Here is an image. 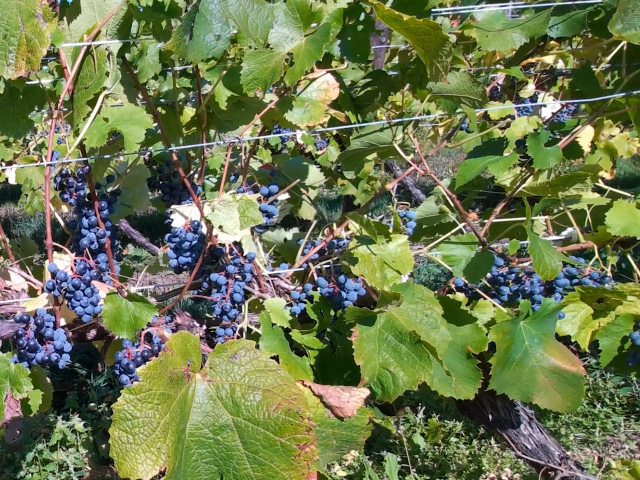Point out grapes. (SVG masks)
<instances>
[{
    "instance_id": "ef6de9ee",
    "label": "grapes",
    "mask_w": 640,
    "mask_h": 480,
    "mask_svg": "<svg viewBox=\"0 0 640 480\" xmlns=\"http://www.w3.org/2000/svg\"><path fill=\"white\" fill-rule=\"evenodd\" d=\"M302 290L303 293L298 290H293L290 293V297L295 301L290 307V313L292 315H299L301 312H304L306 310V305L303 302L298 301L307 300L314 290V285L311 282H305L302 285Z\"/></svg>"
},
{
    "instance_id": "012428b0",
    "label": "grapes",
    "mask_w": 640,
    "mask_h": 480,
    "mask_svg": "<svg viewBox=\"0 0 640 480\" xmlns=\"http://www.w3.org/2000/svg\"><path fill=\"white\" fill-rule=\"evenodd\" d=\"M253 184H254V181H253V180H249L248 182H246V185H245L246 187H244V186H242V185H239V186H237V187H236V191H237L238 193H244V192H247L248 194L254 195V194H255V190H254V189L249 188V187H250V186H252Z\"/></svg>"
},
{
    "instance_id": "9fbda902",
    "label": "grapes",
    "mask_w": 640,
    "mask_h": 480,
    "mask_svg": "<svg viewBox=\"0 0 640 480\" xmlns=\"http://www.w3.org/2000/svg\"><path fill=\"white\" fill-rule=\"evenodd\" d=\"M320 241L318 239L315 240H311L308 243H306L304 245V247L302 248V254L306 255L308 252H310L312 250V248H314Z\"/></svg>"
},
{
    "instance_id": "84f90ec7",
    "label": "grapes",
    "mask_w": 640,
    "mask_h": 480,
    "mask_svg": "<svg viewBox=\"0 0 640 480\" xmlns=\"http://www.w3.org/2000/svg\"><path fill=\"white\" fill-rule=\"evenodd\" d=\"M496 266L489 268L491 276L488 278V284L490 286H499L498 294L495 291H491L489 296L497 304H501L503 301H509L511 299V293L516 300L522 301L524 299L523 294H533L532 300L534 301L531 306V310L536 312L540 309L541 302L544 300L545 286L543 280L539 277V274L532 270L530 267L525 269V272L518 276L522 269L520 267L512 266L509 271L504 274L497 267H504L506 260L500 255H494L492 257Z\"/></svg>"
},
{
    "instance_id": "802abce8",
    "label": "grapes",
    "mask_w": 640,
    "mask_h": 480,
    "mask_svg": "<svg viewBox=\"0 0 640 480\" xmlns=\"http://www.w3.org/2000/svg\"><path fill=\"white\" fill-rule=\"evenodd\" d=\"M257 191L260 196H267L269 200H272L273 197L280 191V186L278 182L271 181L269 183V187H258Z\"/></svg>"
},
{
    "instance_id": "91a60905",
    "label": "grapes",
    "mask_w": 640,
    "mask_h": 480,
    "mask_svg": "<svg viewBox=\"0 0 640 480\" xmlns=\"http://www.w3.org/2000/svg\"><path fill=\"white\" fill-rule=\"evenodd\" d=\"M278 203L279 200L274 199L272 203L265 202L259 205V210L262 211V218L266 223H272L274 221L273 215H277L279 213V210L276 207Z\"/></svg>"
},
{
    "instance_id": "f8a65327",
    "label": "grapes",
    "mask_w": 640,
    "mask_h": 480,
    "mask_svg": "<svg viewBox=\"0 0 640 480\" xmlns=\"http://www.w3.org/2000/svg\"><path fill=\"white\" fill-rule=\"evenodd\" d=\"M203 224L192 220L189 232L183 228H172L170 233L164 236V241L169 243L170 250L167 257L170 267L176 275L192 268L204 246Z\"/></svg>"
},
{
    "instance_id": "e5b3c951",
    "label": "grapes",
    "mask_w": 640,
    "mask_h": 480,
    "mask_svg": "<svg viewBox=\"0 0 640 480\" xmlns=\"http://www.w3.org/2000/svg\"><path fill=\"white\" fill-rule=\"evenodd\" d=\"M172 179L170 173L160 175L158 181L152 183V187L156 190H161V201L165 203L167 208H170L173 204H188L192 200V196L189 192L184 190V186L181 183H176Z\"/></svg>"
},
{
    "instance_id": "dcf779d0",
    "label": "grapes",
    "mask_w": 640,
    "mask_h": 480,
    "mask_svg": "<svg viewBox=\"0 0 640 480\" xmlns=\"http://www.w3.org/2000/svg\"><path fill=\"white\" fill-rule=\"evenodd\" d=\"M237 332V326L233 325L232 329L230 328H217L215 330L216 333V337L214 338V341L218 344H224L227 341V337L228 338H232Z\"/></svg>"
},
{
    "instance_id": "0513c4c2",
    "label": "grapes",
    "mask_w": 640,
    "mask_h": 480,
    "mask_svg": "<svg viewBox=\"0 0 640 480\" xmlns=\"http://www.w3.org/2000/svg\"><path fill=\"white\" fill-rule=\"evenodd\" d=\"M227 250L224 247H217L215 249V255L221 257L225 255ZM230 265H228L226 258L221 257L220 272L227 273L229 276H235L238 272L243 276L242 281H236L231 279L230 283L227 276L219 275L218 273H209L207 278H204L201 282V286L204 289L211 287L212 283L218 285V292L209 294L210 298L219 299L212 303V313L219 320L230 322L236 320L241 315V310L233 308L236 304L245 302V286L253 280L251 274L254 267L252 262L256 259V254L253 252L246 253L244 258L246 261L242 263V258L235 253V249H230Z\"/></svg>"
},
{
    "instance_id": "5460f4e3",
    "label": "grapes",
    "mask_w": 640,
    "mask_h": 480,
    "mask_svg": "<svg viewBox=\"0 0 640 480\" xmlns=\"http://www.w3.org/2000/svg\"><path fill=\"white\" fill-rule=\"evenodd\" d=\"M123 348L120 352L114 354L117 361L115 363L114 374L119 377V381L123 388L132 387L134 381H140L141 377L137 376V368L151 362L150 358L158 357L160 352L164 351L165 345L161 344L158 335L154 333L152 338V350L143 347L141 343H135L131 339H123L121 342Z\"/></svg>"
},
{
    "instance_id": "2adb6a1f",
    "label": "grapes",
    "mask_w": 640,
    "mask_h": 480,
    "mask_svg": "<svg viewBox=\"0 0 640 480\" xmlns=\"http://www.w3.org/2000/svg\"><path fill=\"white\" fill-rule=\"evenodd\" d=\"M333 277L336 279V282L341 285L338 291L339 295L344 299L341 302L343 308L351 306L359 300V297H365L367 295V290L363 287L361 280L359 278H347V275L341 272L339 265L334 267Z\"/></svg>"
},
{
    "instance_id": "01657485",
    "label": "grapes",
    "mask_w": 640,
    "mask_h": 480,
    "mask_svg": "<svg viewBox=\"0 0 640 480\" xmlns=\"http://www.w3.org/2000/svg\"><path fill=\"white\" fill-rule=\"evenodd\" d=\"M93 168L90 165L83 166L77 172V178L74 175L69 177L67 169H61L59 174L53 178L54 191L59 193V199L62 203H67L70 207H74V213L79 215L78 223L81 225V231L78 232L73 239L72 253L77 257L84 255V250L88 247L92 255L93 262L79 260L75 263V271L82 279L73 278L65 269L60 270L57 264H50L48 271L56 275V280L50 278L44 285V292L51 294L57 298L64 295V289L67 293L66 308L69 311H75L77 316L82 317L85 323H90L95 314H101L103 308L99 301L101 294L99 289L91 282L95 279L103 282L107 286H111L113 281L105 275L109 273V266L106 261L105 239L112 236L113 221L109 218L115 212L113 206L117 202L118 196L122 194L120 189H115L109 193L99 197V210L105 230L98 227L96 216L94 213L92 195L86 191L87 183L85 175L90 174Z\"/></svg>"
},
{
    "instance_id": "83cd7487",
    "label": "grapes",
    "mask_w": 640,
    "mask_h": 480,
    "mask_svg": "<svg viewBox=\"0 0 640 480\" xmlns=\"http://www.w3.org/2000/svg\"><path fill=\"white\" fill-rule=\"evenodd\" d=\"M579 271L575 267H564L558 277L551 282V287L554 289L550 296L554 298L557 303H560L563 298L562 292L566 286H591L600 287L601 285H607L612 281L610 276H601L599 273L589 272L586 277H577Z\"/></svg>"
},
{
    "instance_id": "1ff8f66d",
    "label": "grapes",
    "mask_w": 640,
    "mask_h": 480,
    "mask_svg": "<svg viewBox=\"0 0 640 480\" xmlns=\"http://www.w3.org/2000/svg\"><path fill=\"white\" fill-rule=\"evenodd\" d=\"M352 242V238L350 236H347L344 240L340 237H336L332 240H330L327 244H326V249L325 248H321L319 249L318 252L315 253L314 256H312L311 258H309L308 260L310 262H314L317 261L319 258H321L323 255H325L328 251H332V253L334 255H338L342 250H344L350 243Z\"/></svg>"
},
{
    "instance_id": "54f908b8",
    "label": "grapes",
    "mask_w": 640,
    "mask_h": 480,
    "mask_svg": "<svg viewBox=\"0 0 640 480\" xmlns=\"http://www.w3.org/2000/svg\"><path fill=\"white\" fill-rule=\"evenodd\" d=\"M399 217L404 219L406 217L407 221L405 222L406 229L404 230V234L406 236L412 235L414 230L418 227V222L416 219L418 218V213L414 209L410 210H401L399 212Z\"/></svg>"
},
{
    "instance_id": "b958b902",
    "label": "grapes",
    "mask_w": 640,
    "mask_h": 480,
    "mask_svg": "<svg viewBox=\"0 0 640 480\" xmlns=\"http://www.w3.org/2000/svg\"><path fill=\"white\" fill-rule=\"evenodd\" d=\"M15 324H27L19 327L10 339L15 342L18 354L11 356V363L23 364L26 370H30L37 364L51 362L57 364L59 369H64L70 360L69 352L73 345L68 342L67 332L63 328L56 329L55 316L47 313L44 309H37L35 315L27 313L16 314L12 317ZM50 339L45 347L35 339V330Z\"/></svg>"
}]
</instances>
